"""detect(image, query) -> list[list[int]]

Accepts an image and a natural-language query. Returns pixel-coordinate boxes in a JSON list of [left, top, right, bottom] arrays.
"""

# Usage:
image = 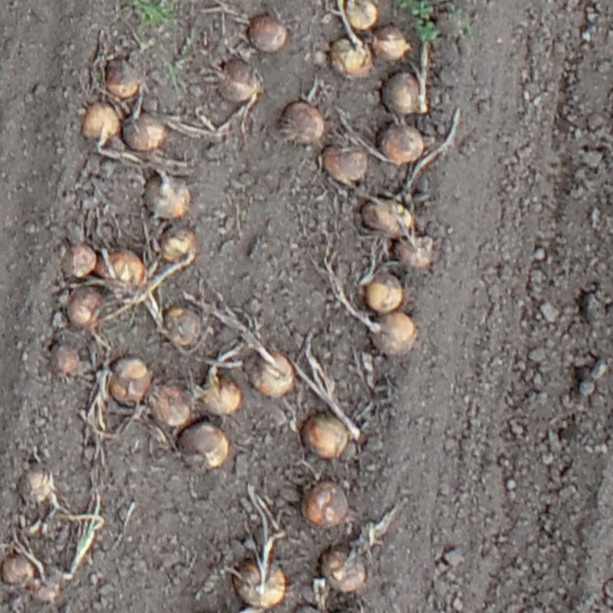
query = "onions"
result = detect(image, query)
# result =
[[378, 124, 421, 164], [372, 29, 409, 60], [123, 116, 163, 152], [28, 576, 61, 600], [396, 233, 433, 269], [381, 73, 421, 115], [147, 175, 189, 215], [246, 349, 291, 397], [47, 339, 91, 376], [321, 143, 366, 184], [278, 101, 323, 145], [157, 227, 194, 262], [102, 66, 138, 101], [324, 547, 368, 592], [80, 104, 120, 142], [177, 421, 227, 466], [378, 203, 413, 237], [2, 551, 35, 587], [107, 357, 151, 404], [302, 413, 347, 458], [330, 38, 371, 76], [216, 58, 257, 102], [62, 243, 96, 278], [201, 378, 241, 415], [368, 311, 414, 354], [246, 13, 285, 53], [366, 203, 389, 228], [233, 559, 284, 605], [341, 0, 379, 28], [361, 273, 400, 311], [19, 467, 54, 503], [64, 289, 102, 328], [101, 251, 141, 287], [160, 303, 202, 347], [154, 383, 194, 426], [302, 483, 349, 527]]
